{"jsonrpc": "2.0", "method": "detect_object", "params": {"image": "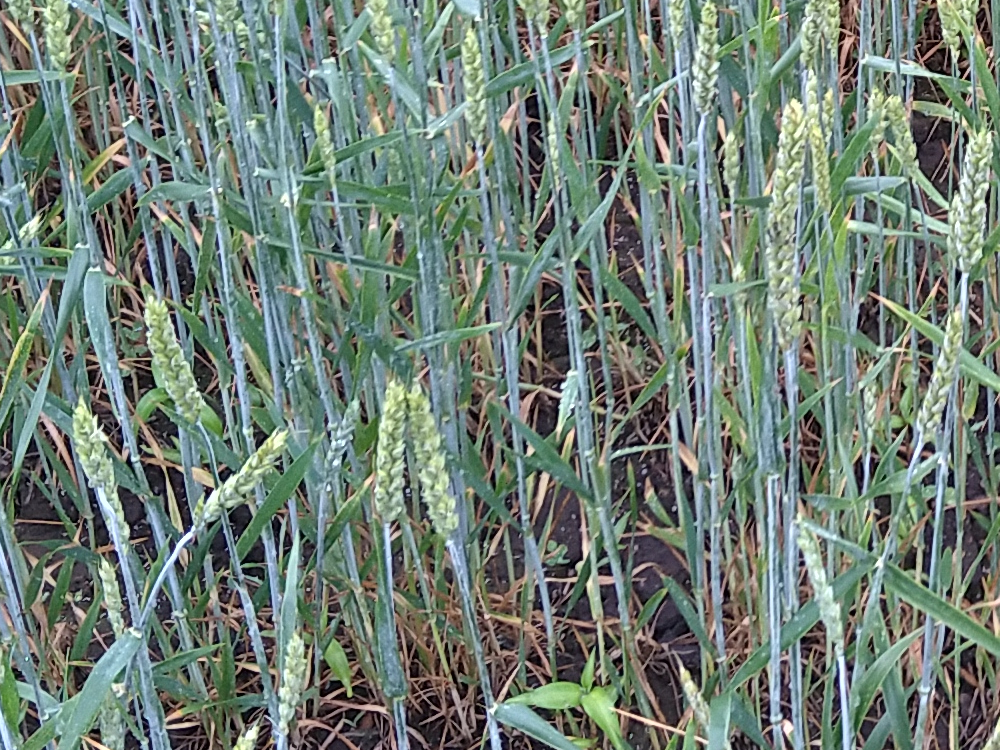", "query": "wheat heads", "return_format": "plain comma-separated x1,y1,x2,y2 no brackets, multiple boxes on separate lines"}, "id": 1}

971,715,1000,750
862,379,879,443
416,477,458,538
765,103,807,346
0,240,20,324
801,0,824,66
822,0,840,54
372,477,410,521
527,0,549,29
666,0,688,42
955,131,993,269
71,400,129,544
202,431,289,525
374,383,408,519
358,0,395,57
99,559,125,637
143,297,202,424
407,385,458,536
917,314,964,437
680,668,710,732
42,0,70,67
210,0,243,46
323,400,361,478
959,0,979,29
98,477,129,550
462,28,487,139
101,689,125,750
796,521,842,648
886,95,916,169
936,0,962,54
341,0,396,58
278,634,309,729
806,78,831,210
694,2,720,109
